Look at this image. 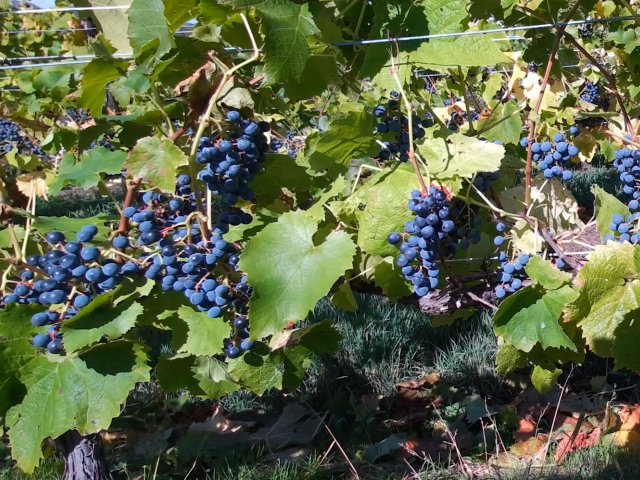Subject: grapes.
Here are the masks:
<instances>
[{"mask_svg":"<svg viewBox=\"0 0 640 480\" xmlns=\"http://www.w3.org/2000/svg\"><path fill=\"white\" fill-rule=\"evenodd\" d=\"M123 215L131 217L134 223H138L137 231L140 233L137 238L139 245H152L157 241V249L161 252L162 265L165 267V275L161 278L160 290L182 291L184 297L188 299L190 305H195L197 311H205L210 318H217L222 314L221 306L228 305L230 308L241 307L243 298L241 296H231L227 285H218L215 279H204L200 283V290L197 291L196 280L204 277L209 270L216 267V259H224L225 265H232V270L237 271L239 255L234 247H228V241L222 239L221 235L230 233V226L239 227L242 224H251L253 216L246 212L219 214V224L213 228L210 234L209 244L213 246L211 253L203 255L196 253V246L203 247L205 242L199 240L195 245H186L181 253L182 258H189L183 262L177 260V248L174 245L176 239L184 238L188 234L187 228H179L171 238H161V232L157 228L155 211H139L136 207L123 209Z\"/></svg>","mask_w":640,"mask_h":480,"instance_id":"01657485","label":"grapes"},{"mask_svg":"<svg viewBox=\"0 0 640 480\" xmlns=\"http://www.w3.org/2000/svg\"><path fill=\"white\" fill-rule=\"evenodd\" d=\"M98 236V228L95 225H86L77 233L78 241H67L60 231H47L45 242L50 246L64 244V251L51 250L46 255L32 254L27 258L29 267L38 266L42 272L50 276L48 280H35L30 290L25 284H17L13 294H6L1 298V304L20 305H55L67 302L66 290L69 287V279L82 277L84 284H95V290L102 294L120 285L125 276H135L141 271L139 263L126 262L118 264L111 259H105L101 268H88L81 264L94 262L101 257V251L94 246H84L91 243Z\"/></svg>","mask_w":640,"mask_h":480,"instance_id":"b958b902","label":"grapes"},{"mask_svg":"<svg viewBox=\"0 0 640 480\" xmlns=\"http://www.w3.org/2000/svg\"><path fill=\"white\" fill-rule=\"evenodd\" d=\"M240 126L243 134L235 142L237 151L230 140L220 141L216 147L208 136H201L195 155L197 164L209 163V168L197 172V180L208 184L213 195L228 194L229 205H235L238 197L242 201L255 198V191L249 184L260 172V163L265 161L268 152L267 137L262 134L270 130L268 122L242 119Z\"/></svg>","mask_w":640,"mask_h":480,"instance_id":"0513c4c2","label":"grapes"},{"mask_svg":"<svg viewBox=\"0 0 640 480\" xmlns=\"http://www.w3.org/2000/svg\"><path fill=\"white\" fill-rule=\"evenodd\" d=\"M407 208L415 211L414 221H408L404 225L407 234H414L407 242H401V236L395 232L387 234V242L390 245H398L401 254L396 259V265L401 267L404 278L414 285V293L417 296H426L430 289L440 285V268L437 266L438 251L435 240H443L448 234L456 230V224L448 219L450 206L446 203V192L436 186L429 188V196H421L419 190L411 193V200L407 202ZM421 263L428 267L426 275L428 280L424 283V274L416 272L411 265L417 257Z\"/></svg>","mask_w":640,"mask_h":480,"instance_id":"84f90ec7","label":"grapes"},{"mask_svg":"<svg viewBox=\"0 0 640 480\" xmlns=\"http://www.w3.org/2000/svg\"><path fill=\"white\" fill-rule=\"evenodd\" d=\"M567 138L566 133H555L553 135V142L555 143V152L553 155L552 145L550 143H532L530 145V151L533 153V161L538 162V168L542 171V176L545 179H552L554 176L560 177L562 181H570L572 179V172L565 170L560 166H552L555 162L568 161L571 157L578 155V148L575 145H570L564 142Z\"/></svg>","mask_w":640,"mask_h":480,"instance_id":"f8a65327","label":"grapes"},{"mask_svg":"<svg viewBox=\"0 0 640 480\" xmlns=\"http://www.w3.org/2000/svg\"><path fill=\"white\" fill-rule=\"evenodd\" d=\"M614 168L619 172V179L623 184V192L632 195L628 203L631 211L640 208V191L635 190V178H640V150L629 148L615 149L613 151Z\"/></svg>","mask_w":640,"mask_h":480,"instance_id":"5460f4e3","label":"grapes"},{"mask_svg":"<svg viewBox=\"0 0 640 480\" xmlns=\"http://www.w3.org/2000/svg\"><path fill=\"white\" fill-rule=\"evenodd\" d=\"M498 261L501 262L502 271L497 273V280L500 283H508L505 286H500L495 291V296L498 299H504L507 295V291L515 293L522 288V281L528 279V274L525 272L523 265L530 262V256L528 254H521L515 263H510L507 259V254L504 250L498 251Z\"/></svg>","mask_w":640,"mask_h":480,"instance_id":"83cd7487","label":"grapes"},{"mask_svg":"<svg viewBox=\"0 0 640 480\" xmlns=\"http://www.w3.org/2000/svg\"><path fill=\"white\" fill-rule=\"evenodd\" d=\"M31 343L35 348H45L48 354H60L64 349L60 332L49 326L46 333H37L31 338Z\"/></svg>","mask_w":640,"mask_h":480,"instance_id":"e5b3c951","label":"grapes"},{"mask_svg":"<svg viewBox=\"0 0 640 480\" xmlns=\"http://www.w3.org/2000/svg\"><path fill=\"white\" fill-rule=\"evenodd\" d=\"M638 217H640V212H633L626 218L625 222L624 217L621 214H615L612 217V221L609 223V230L618 231L621 234L620 238L618 239L619 244H623L624 241H628L634 244H640V231H637L631 236L628 234L631 221L635 220Z\"/></svg>","mask_w":640,"mask_h":480,"instance_id":"2adb6a1f","label":"grapes"},{"mask_svg":"<svg viewBox=\"0 0 640 480\" xmlns=\"http://www.w3.org/2000/svg\"><path fill=\"white\" fill-rule=\"evenodd\" d=\"M58 321H59V313L54 310L34 312L31 315V326L33 328H42L50 324H55Z\"/></svg>","mask_w":640,"mask_h":480,"instance_id":"ef6de9ee","label":"grapes"},{"mask_svg":"<svg viewBox=\"0 0 640 480\" xmlns=\"http://www.w3.org/2000/svg\"><path fill=\"white\" fill-rule=\"evenodd\" d=\"M177 191L180 196H188L190 201L188 202V209L195 211L197 209L194 196L195 193L191 191L189 174H181L176 177Z\"/></svg>","mask_w":640,"mask_h":480,"instance_id":"1ff8f66d","label":"grapes"},{"mask_svg":"<svg viewBox=\"0 0 640 480\" xmlns=\"http://www.w3.org/2000/svg\"><path fill=\"white\" fill-rule=\"evenodd\" d=\"M151 256V252H142L140 256L141 260H147L148 263H151L148 269L144 272V277L146 279H154L161 274V259L159 257Z\"/></svg>","mask_w":640,"mask_h":480,"instance_id":"54f908b8","label":"grapes"},{"mask_svg":"<svg viewBox=\"0 0 640 480\" xmlns=\"http://www.w3.org/2000/svg\"><path fill=\"white\" fill-rule=\"evenodd\" d=\"M384 146L386 148H388L393 154H398L399 151H400L401 152L400 155H399V160L400 161H404V162H408L409 161V153H408V151L410 150V146H409V134L408 133H403L402 134L401 143L399 145L393 146L389 142H385Z\"/></svg>","mask_w":640,"mask_h":480,"instance_id":"91a60905","label":"grapes"},{"mask_svg":"<svg viewBox=\"0 0 640 480\" xmlns=\"http://www.w3.org/2000/svg\"><path fill=\"white\" fill-rule=\"evenodd\" d=\"M91 303V297L87 294H77L73 299V305L71 308L64 312L66 319H73L83 307H86Z\"/></svg>","mask_w":640,"mask_h":480,"instance_id":"dcf779d0","label":"grapes"},{"mask_svg":"<svg viewBox=\"0 0 640 480\" xmlns=\"http://www.w3.org/2000/svg\"><path fill=\"white\" fill-rule=\"evenodd\" d=\"M254 347V342L249 339H243L240 342V348L242 350H250ZM240 348L238 346H234L232 343H225L223 345L224 353L228 359H235L240 355Z\"/></svg>","mask_w":640,"mask_h":480,"instance_id":"802abce8","label":"grapes"},{"mask_svg":"<svg viewBox=\"0 0 640 480\" xmlns=\"http://www.w3.org/2000/svg\"><path fill=\"white\" fill-rule=\"evenodd\" d=\"M411 122H412V133L414 134L415 138H423L425 135V129L424 128H430L432 126V120L431 119H424L421 120L420 117H418L417 115H413L411 117Z\"/></svg>","mask_w":640,"mask_h":480,"instance_id":"012428b0","label":"grapes"},{"mask_svg":"<svg viewBox=\"0 0 640 480\" xmlns=\"http://www.w3.org/2000/svg\"><path fill=\"white\" fill-rule=\"evenodd\" d=\"M401 130V126L398 123L397 117H388L385 123H378L375 126V131L379 134H387L388 132L398 133Z\"/></svg>","mask_w":640,"mask_h":480,"instance_id":"9fbda902","label":"grapes"},{"mask_svg":"<svg viewBox=\"0 0 640 480\" xmlns=\"http://www.w3.org/2000/svg\"><path fill=\"white\" fill-rule=\"evenodd\" d=\"M153 201L158 204H165L167 202V196L157 193L156 191H146L141 195V202L143 204H150Z\"/></svg>","mask_w":640,"mask_h":480,"instance_id":"34c12dc5","label":"grapes"},{"mask_svg":"<svg viewBox=\"0 0 640 480\" xmlns=\"http://www.w3.org/2000/svg\"><path fill=\"white\" fill-rule=\"evenodd\" d=\"M248 283V277L247 276H241L239 278V283H237L235 285V289L238 292H244V295L246 298H250L252 295V287L247 285Z\"/></svg>","mask_w":640,"mask_h":480,"instance_id":"4a4d1313","label":"grapes"},{"mask_svg":"<svg viewBox=\"0 0 640 480\" xmlns=\"http://www.w3.org/2000/svg\"><path fill=\"white\" fill-rule=\"evenodd\" d=\"M186 217H187L186 215H181L179 217H176L174 214H170L167 216V221L159 220L158 225L164 226V227H171L174 224L185 223Z\"/></svg>","mask_w":640,"mask_h":480,"instance_id":"23402543","label":"grapes"},{"mask_svg":"<svg viewBox=\"0 0 640 480\" xmlns=\"http://www.w3.org/2000/svg\"><path fill=\"white\" fill-rule=\"evenodd\" d=\"M190 231H191V239L195 240L197 236L201 235V231L198 227V221L194 220L193 223L190 225Z\"/></svg>","mask_w":640,"mask_h":480,"instance_id":"62ce99fe","label":"grapes"}]
</instances>
